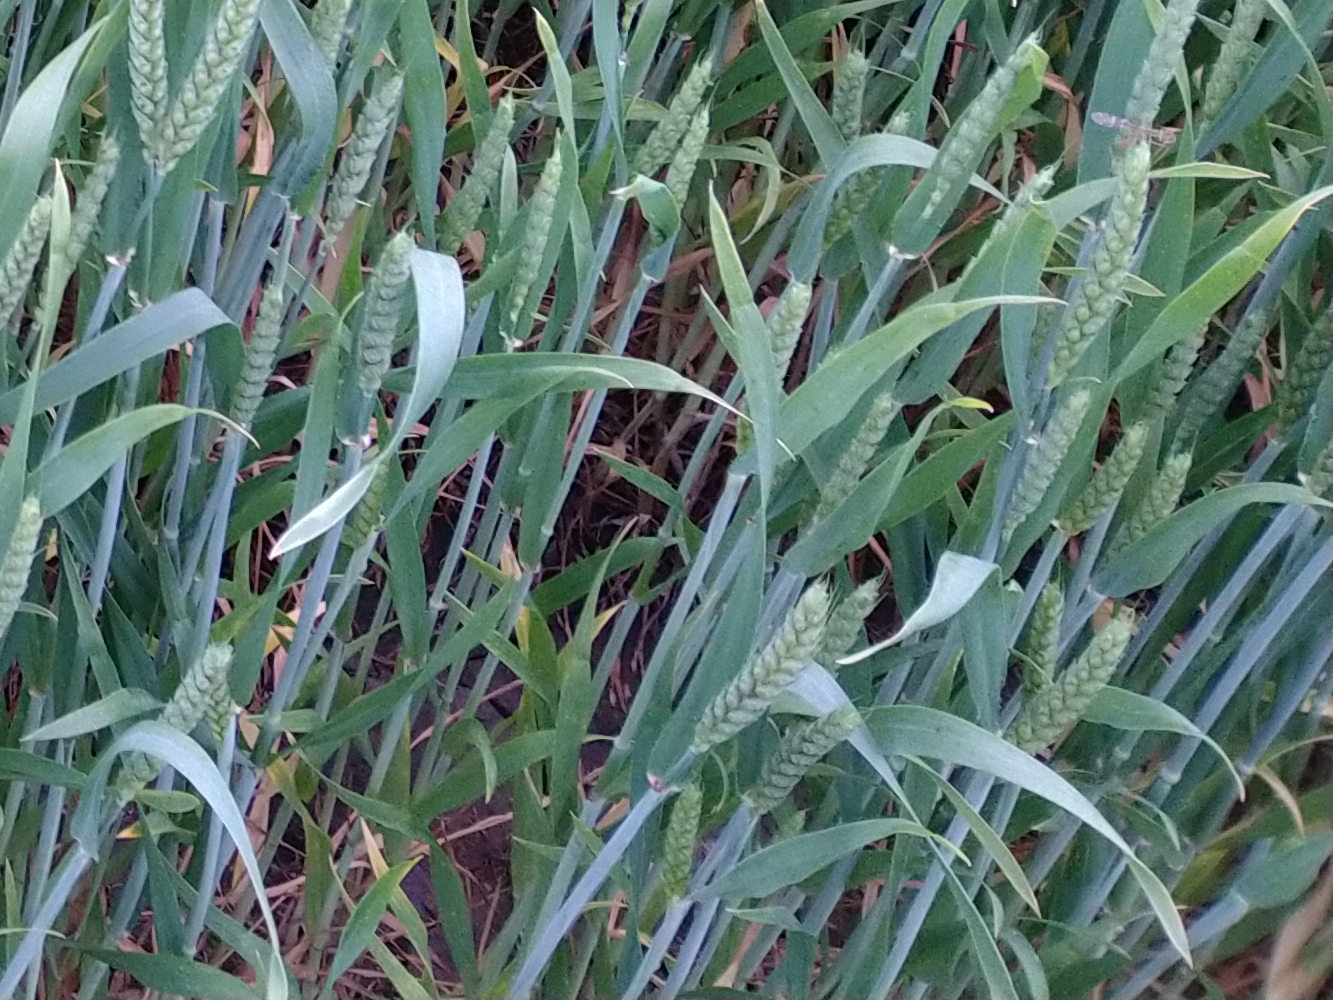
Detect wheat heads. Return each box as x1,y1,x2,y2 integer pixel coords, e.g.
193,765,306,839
1005,390,1092,533
749,708,861,809
340,463,389,545
663,785,703,894
356,233,416,391
229,284,285,429
116,651,233,796
834,54,868,144
822,117,909,248
204,675,233,742
1061,425,1149,529
813,393,896,529
821,579,883,672
1168,313,1269,460
958,161,1053,285
323,73,406,239
130,0,169,149
0,195,53,367
632,59,714,178
1200,0,1287,124
1006,616,1136,751
438,98,516,252
922,48,1034,218
1306,375,1333,509
693,588,833,751
1119,0,1212,147
738,282,812,450
1024,585,1065,696
1048,149,1153,383
1106,455,1193,557
505,133,565,327
158,0,275,169
66,136,120,265
311,0,352,67
1276,299,1333,425
667,109,711,210
0,496,43,647
1144,320,1209,419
